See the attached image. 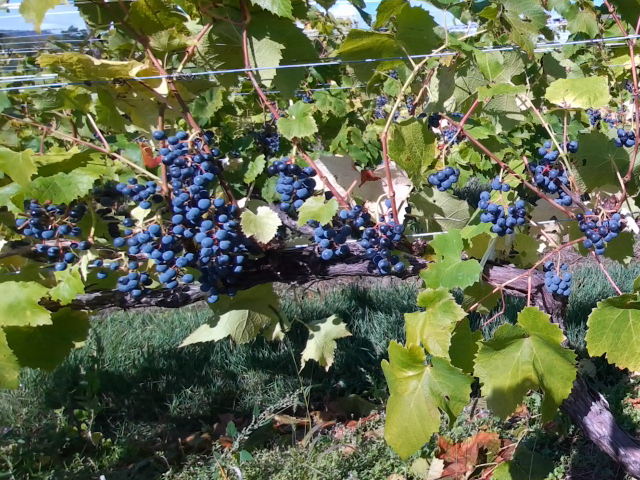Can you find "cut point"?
<instances>
[{
  "mask_svg": "<svg viewBox=\"0 0 640 480\" xmlns=\"http://www.w3.org/2000/svg\"><path fill=\"white\" fill-rule=\"evenodd\" d=\"M386 196H389V193H388V192H387V193H383V194H381V195L378 197V199H377V202H376V208H375V217H376V220H379L378 211H379V204H380V201H381L384 197H386Z\"/></svg>",
  "mask_w": 640,
  "mask_h": 480,
  "instance_id": "cut-point-1",
  "label": "cut point"
},
{
  "mask_svg": "<svg viewBox=\"0 0 640 480\" xmlns=\"http://www.w3.org/2000/svg\"><path fill=\"white\" fill-rule=\"evenodd\" d=\"M596 207L599 208L601 210L600 214H599V218H602L603 215L607 216V213H610V210L605 209L604 207H602L600 204H596Z\"/></svg>",
  "mask_w": 640,
  "mask_h": 480,
  "instance_id": "cut-point-2",
  "label": "cut point"
}]
</instances>
